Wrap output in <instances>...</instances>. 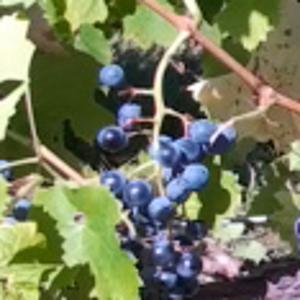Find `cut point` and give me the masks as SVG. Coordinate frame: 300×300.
Here are the masks:
<instances>
[{"label":"cut point","instance_id":"obj_2","mask_svg":"<svg viewBox=\"0 0 300 300\" xmlns=\"http://www.w3.org/2000/svg\"><path fill=\"white\" fill-rule=\"evenodd\" d=\"M267 110L266 106H262L260 103L251 107L250 109H247L246 111L234 114L229 117V122L231 124H238V123H244L251 118H254L255 116L264 113Z\"/></svg>","mask_w":300,"mask_h":300},{"label":"cut point","instance_id":"obj_1","mask_svg":"<svg viewBox=\"0 0 300 300\" xmlns=\"http://www.w3.org/2000/svg\"><path fill=\"white\" fill-rule=\"evenodd\" d=\"M189 38L190 36L183 31L177 36L174 44L167 51L159 68L154 73L151 81V88L140 90L130 88L128 90V96L133 99L154 98L156 105V114L152 122V134L154 136H159L161 134V127L165 119V114L181 119L183 122H188L190 120V114L186 110L179 109L170 104H165L164 83L162 82L166 73L169 71L172 62Z\"/></svg>","mask_w":300,"mask_h":300}]
</instances>
